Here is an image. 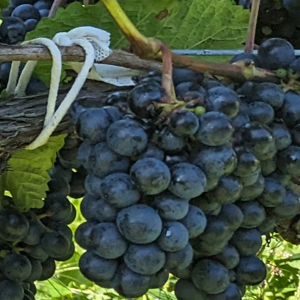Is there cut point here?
<instances>
[{
    "mask_svg": "<svg viewBox=\"0 0 300 300\" xmlns=\"http://www.w3.org/2000/svg\"><path fill=\"white\" fill-rule=\"evenodd\" d=\"M162 87L166 90V92L174 91L171 54L165 48H163V59H162Z\"/></svg>",
    "mask_w": 300,
    "mask_h": 300,
    "instance_id": "cut-point-1",
    "label": "cut point"
}]
</instances>
